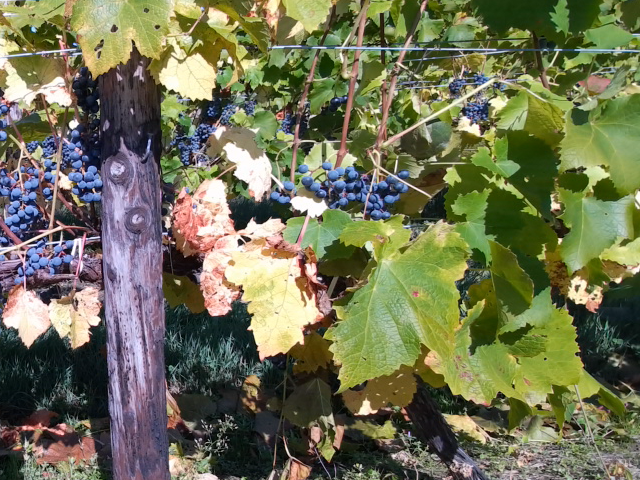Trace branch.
<instances>
[{
  "label": "branch",
  "mask_w": 640,
  "mask_h": 480,
  "mask_svg": "<svg viewBox=\"0 0 640 480\" xmlns=\"http://www.w3.org/2000/svg\"><path fill=\"white\" fill-rule=\"evenodd\" d=\"M321 54V51H316L314 53V57L312 59V63L309 69V72L307 74V78H306V87L303 90L302 96H301V100L298 104V108H297V114H296V118H295V130L293 133V145H292V154H291V158H290V164H289V181L293 182L295 179V172H296V165H295V160L297 157V153H298V143H299V133H300V120H301V116H302V110H303V106L306 103V98H307V94L311 89V80L313 77V74L315 72V68L317 65V61L319 59V56Z\"/></svg>",
  "instance_id": "4"
},
{
  "label": "branch",
  "mask_w": 640,
  "mask_h": 480,
  "mask_svg": "<svg viewBox=\"0 0 640 480\" xmlns=\"http://www.w3.org/2000/svg\"><path fill=\"white\" fill-rule=\"evenodd\" d=\"M367 15V12L364 11V15L360 20L359 27L357 28V38L355 41V46H362L363 35H364V17Z\"/></svg>",
  "instance_id": "8"
},
{
  "label": "branch",
  "mask_w": 640,
  "mask_h": 480,
  "mask_svg": "<svg viewBox=\"0 0 640 480\" xmlns=\"http://www.w3.org/2000/svg\"><path fill=\"white\" fill-rule=\"evenodd\" d=\"M361 57L360 51H355L352 58V65L348 75V92H347V102L345 106V114L342 122V127L340 131V139H339V154L335 157V164L340 166L342 164V160L346 156V141H347V133L349 129V125L352 119V109H353V100L355 94V84L357 79V72L359 67V60Z\"/></svg>",
  "instance_id": "3"
},
{
  "label": "branch",
  "mask_w": 640,
  "mask_h": 480,
  "mask_svg": "<svg viewBox=\"0 0 640 480\" xmlns=\"http://www.w3.org/2000/svg\"><path fill=\"white\" fill-rule=\"evenodd\" d=\"M68 113H69V107L65 106L64 107V111H63V115H62V118H61V123H60V140H59V146L57 148V167H56V170H55V186L50 182L46 183V186L53 193V200H52V204H51V214L48 211H46L43 206L39 207V212L49 220V224L46 225V228L47 229H51V230L42 232L39 235H37L36 237L31 238V239L27 240L26 242L22 243L11 232V230L7 227L5 222L2 219H0V226L2 227V230L16 244L15 246L10 247L9 251H2V255L3 256H6L9 253L17 251L19 249H22L23 251H27L28 250V247H27L28 243H36L39 240H41L42 238L47 237V236H48V241L49 240H53L54 239V234H58V233H61V232H64V233L70 235L71 237L75 236V232L73 230L90 232V233H93L95 236H99L100 235V232L97 229L93 228V227L80 226V225H77V224L65 225L64 226L58 219H56V207H57L58 200H60L61 204L64 205L65 208L78 221L82 220L81 215L79 213H77L74 210V208L66 201V199L59 193L60 192V172H61V169H62V150L64 148V142H65V125H66V120H67V117H68Z\"/></svg>",
  "instance_id": "1"
},
{
  "label": "branch",
  "mask_w": 640,
  "mask_h": 480,
  "mask_svg": "<svg viewBox=\"0 0 640 480\" xmlns=\"http://www.w3.org/2000/svg\"><path fill=\"white\" fill-rule=\"evenodd\" d=\"M429 4L428 0H422L421 3L418 5L416 12L414 14V18L412 21V24L409 27L408 30V34L404 40V42L402 43V46H410L411 42L413 41V38L415 36V32L417 30V27L419 26V23L421 21V16L424 12V9L426 8V6Z\"/></svg>",
  "instance_id": "6"
},
{
  "label": "branch",
  "mask_w": 640,
  "mask_h": 480,
  "mask_svg": "<svg viewBox=\"0 0 640 480\" xmlns=\"http://www.w3.org/2000/svg\"><path fill=\"white\" fill-rule=\"evenodd\" d=\"M385 14L381 13L379 15V25H380V33H379V44L381 47H385L386 43L384 42L385 36V23H384Z\"/></svg>",
  "instance_id": "9"
},
{
  "label": "branch",
  "mask_w": 640,
  "mask_h": 480,
  "mask_svg": "<svg viewBox=\"0 0 640 480\" xmlns=\"http://www.w3.org/2000/svg\"><path fill=\"white\" fill-rule=\"evenodd\" d=\"M335 18H336V12L332 11L331 12V16H330V20L328 22V25L325 28V31L323 32V35L320 37V40L318 41V45L319 46H322L324 44L325 40L327 39V37H328L332 27H333V24L335 22Z\"/></svg>",
  "instance_id": "7"
},
{
  "label": "branch",
  "mask_w": 640,
  "mask_h": 480,
  "mask_svg": "<svg viewBox=\"0 0 640 480\" xmlns=\"http://www.w3.org/2000/svg\"><path fill=\"white\" fill-rule=\"evenodd\" d=\"M404 57L405 53L403 51H400L397 54L388 77V83H383L381 85V119L374 135V141L366 149V153L368 155H371L375 149L380 147L381 140L385 141L388 137V114L392 104L395 79Z\"/></svg>",
  "instance_id": "2"
},
{
  "label": "branch",
  "mask_w": 640,
  "mask_h": 480,
  "mask_svg": "<svg viewBox=\"0 0 640 480\" xmlns=\"http://www.w3.org/2000/svg\"><path fill=\"white\" fill-rule=\"evenodd\" d=\"M6 118L9 122V124L11 125L14 135L11 132H7L6 136L11 140V142L16 145L22 152V155L24 156L25 160L31 164V166L33 167V169L36 172L40 171V167L38 166V164L30 157V155L27 152V149L25 147V142L22 138V135L19 133L18 127L16 125V123L14 122L12 116L10 114L6 115Z\"/></svg>",
  "instance_id": "5"
}]
</instances>
